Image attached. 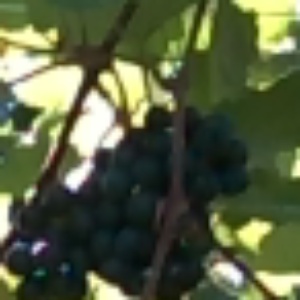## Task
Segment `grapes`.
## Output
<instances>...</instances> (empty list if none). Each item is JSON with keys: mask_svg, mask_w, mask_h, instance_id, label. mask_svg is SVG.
<instances>
[{"mask_svg": "<svg viewBox=\"0 0 300 300\" xmlns=\"http://www.w3.org/2000/svg\"><path fill=\"white\" fill-rule=\"evenodd\" d=\"M198 272L199 259L193 249L182 247L173 250L162 269L157 298L179 300L181 288L193 285Z\"/></svg>", "mask_w": 300, "mask_h": 300, "instance_id": "grapes-3", "label": "grapes"}, {"mask_svg": "<svg viewBox=\"0 0 300 300\" xmlns=\"http://www.w3.org/2000/svg\"><path fill=\"white\" fill-rule=\"evenodd\" d=\"M170 122L168 107H153L144 116L146 129L95 152V167L79 190L53 180L38 192V206L27 199L8 206L19 236L3 262L8 272L26 275L16 288L19 300H82L90 269L128 295L141 291L163 235L156 209L167 188Z\"/></svg>", "mask_w": 300, "mask_h": 300, "instance_id": "grapes-1", "label": "grapes"}, {"mask_svg": "<svg viewBox=\"0 0 300 300\" xmlns=\"http://www.w3.org/2000/svg\"><path fill=\"white\" fill-rule=\"evenodd\" d=\"M178 122L184 131L187 163L184 187L197 199L214 194L235 197L250 187L247 144L231 135L232 125L222 112L202 115L193 107L182 109Z\"/></svg>", "mask_w": 300, "mask_h": 300, "instance_id": "grapes-2", "label": "grapes"}]
</instances>
